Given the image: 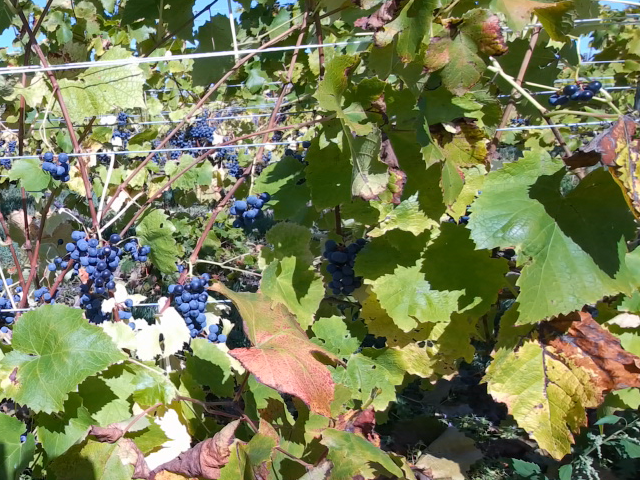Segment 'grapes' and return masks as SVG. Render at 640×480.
<instances>
[{"label": "grapes", "instance_id": "obj_1", "mask_svg": "<svg viewBox=\"0 0 640 480\" xmlns=\"http://www.w3.org/2000/svg\"><path fill=\"white\" fill-rule=\"evenodd\" d=\"M87 233L80 229L71 230V239L76 242H68L65 250L69 252V258L75 261L73 274L78 275L81 266L85 267L88 278L92 280L93 290L98 295L108 297L107 290L115 288L113 273L118 268L122 251L111 245L99 247L97 239H85Z\"/></svg>", "mask_w": 640, "mask_h": 480}, {"label": "grapes", "instance_id": "obj_6", "mask_svg": "<svg viewBox=\"0 0 640 480\" xmlns=\"http://www.w3.org/2000/svg\"><path fill=\"white\" fill-rule=\"evenodd\" d=\"M69 160V156L67 153H59L58 154V162L54 163V153L52 151H47L44 153V162L42 163V170L48 171L55 180H61L62 182H68L70 179L69 171L71 170V165L67 163Z\"/></svg>", "mask_w": 640, "mask_h": 480}, {"label": "grapes", "instance_id": "obj_7", "mask_svg": "<svg viewBox=\"0 0 640 480\" xmlns=\"http://www.w3.org/2000/svg\"><path fill=\"white\" fill-rule=\"evenodd\" d=\"M79 291L82 295L79 297V303L84 305L86 311V318L93 323H103L104 320H109L111 315L109 313H103L100 310L101 302L99 299H94L93 295L89 293V287L87 285H80Z\"/></svg>", "mask_w": 640, "mask_h": 480}, {"label": "grapes", "instance_id": "obj_8", "mask_svg": "<svg viewBox=\"0 0 640 480\" xmlns=\"http://www.w3.org/2000/svg\"><path fill=\"white\" fill-rule=\"evenodd\" d=\"M137 240L130 239L123 245V251L129 252L135 261H147V255L152 252V248L148 245H142L137 248Z\"/></svg>", "mask_w": 640, "mask_h": 480}, {"label": "grapes", "instance_id": "obj_3", "mask_svg": "<svg viewBox=\"0 0 640 480\" xmlns=\"http://www.w3.org/2000/svg\"><path fill=\"white\" fill-rule=\"evenodd\" d=\"M365 245L366 241L363 238H358L355 243H350L348 247H345L344 251H338V245L335 241L327 240L325 242V251L322 253V257L331 262L326 266V271L333 275V281L329 282L328 286L334 294L342 292L345 296H349L355 288L361 286L363 277H355L351 267L354 265L356 255Z\"/></svg>", "mask_w": 640, "mask_h": 480}, {"label": "grapes", "instance_id": "obj_9", "mask_svg": "<svg viewBox=\"0 0 640 480\" xmlns=\"http://www.w3.org/2000/svg\"><path fill=\"white\" fill-rule=\"evenodd\" d=\"M33 296H34V300L36 302H39L41 297H42V301L43 302H49L51 304H54L56 302V299L53 298V296L50 295V290L47 287H40L37 290H35L33 292Z\"/></svg>", "mask_w": 640, "mask_h": 480}, {"label": "grapes", "instance_id": "obj_11", "mask_svg": "<svg viewBox=\"0 0 640 480\" xmlns=\"http://www.w3.org/2000/svg\"><path fill=\"white\" fill-rule=\"evenodd\" d=\"M15 292L18 293V294L12 296L13 302L14 303H20L22 301V296L19 295V294L23 293L22 286H17L15 288Z\"/></svg>", "mask_w": 640, "mask_h": 480}, {"label": "grapes", "instance_id": "obj_10", "mask_svg": "<svg viewBox=\"0 0 640 480\" xmlns=\"http://www.w3.org/2000/svg\"><path fill=\"white\" fill-rule=\"evenodd\" d=\"M58 265L64 269L68 265V261L64 260L63 257H54L53 262L49 263L47 268L49 271H56L58 269Z\"/></svg>", "mask_w": 640, "mask_h": 480}, {"label": "grapes", "instance_id": "obj_5", "mask_svg": "<svg viewBox=\"0 0 640 480\" xmlns=\"http://www.w3.org/2000/svg\"><path fill=\"white\" fill-rule=\"evenodd\" d=\"M602 88V83L599 80H591L585 90L577 85H565L562 88V93L552 94L547 98V103L551 107L558 105H565L570 100L576 101H589L597 92Z\"/></svg>", "mask_w": 640, "mask_h": 480}, {"label": "grapes", "instance_id": "obj_4", "mask_svg": "<svg viewBox=\"0 0 640 480\" xmlns=\"http://www.w3.org/2000/svg\"><path fill=\"white\" fill-rule=\"evenodd\" d=\"M271 199L268 192H263L259 197L250 195L245 200H236L234 206L229 208L232 216L239 217L232 222L234 228L252 226L260 214V208Z\"/></svg>", "mask_w": 640, "mask_h": 480}, {"label": "grapes", "instance_id": "obj_2", "mask_svg": "<svg viewBox=\"0 0 640 480\" xmlns=\"http://www.w3.org/2000/svg\"><path fill=\"white\" fill-rule=\"evenodd\" d=\"M211 275L209 273H203L201 278L193 276L189 285L183 284H170L167 290L170 294L177 296L175 298L176 308L181 312L182 318L187 323V329L190 331V336L195 338L200 335L207 327L206 322V305L209 298V293L206 288L209 286ZM220 327L216 324H210L207 327L208 341L217 344H222L227 341V337L223 334H218Z\"/></svg>", "mask_w": 640, "mask_h": 480}]
</instances>
